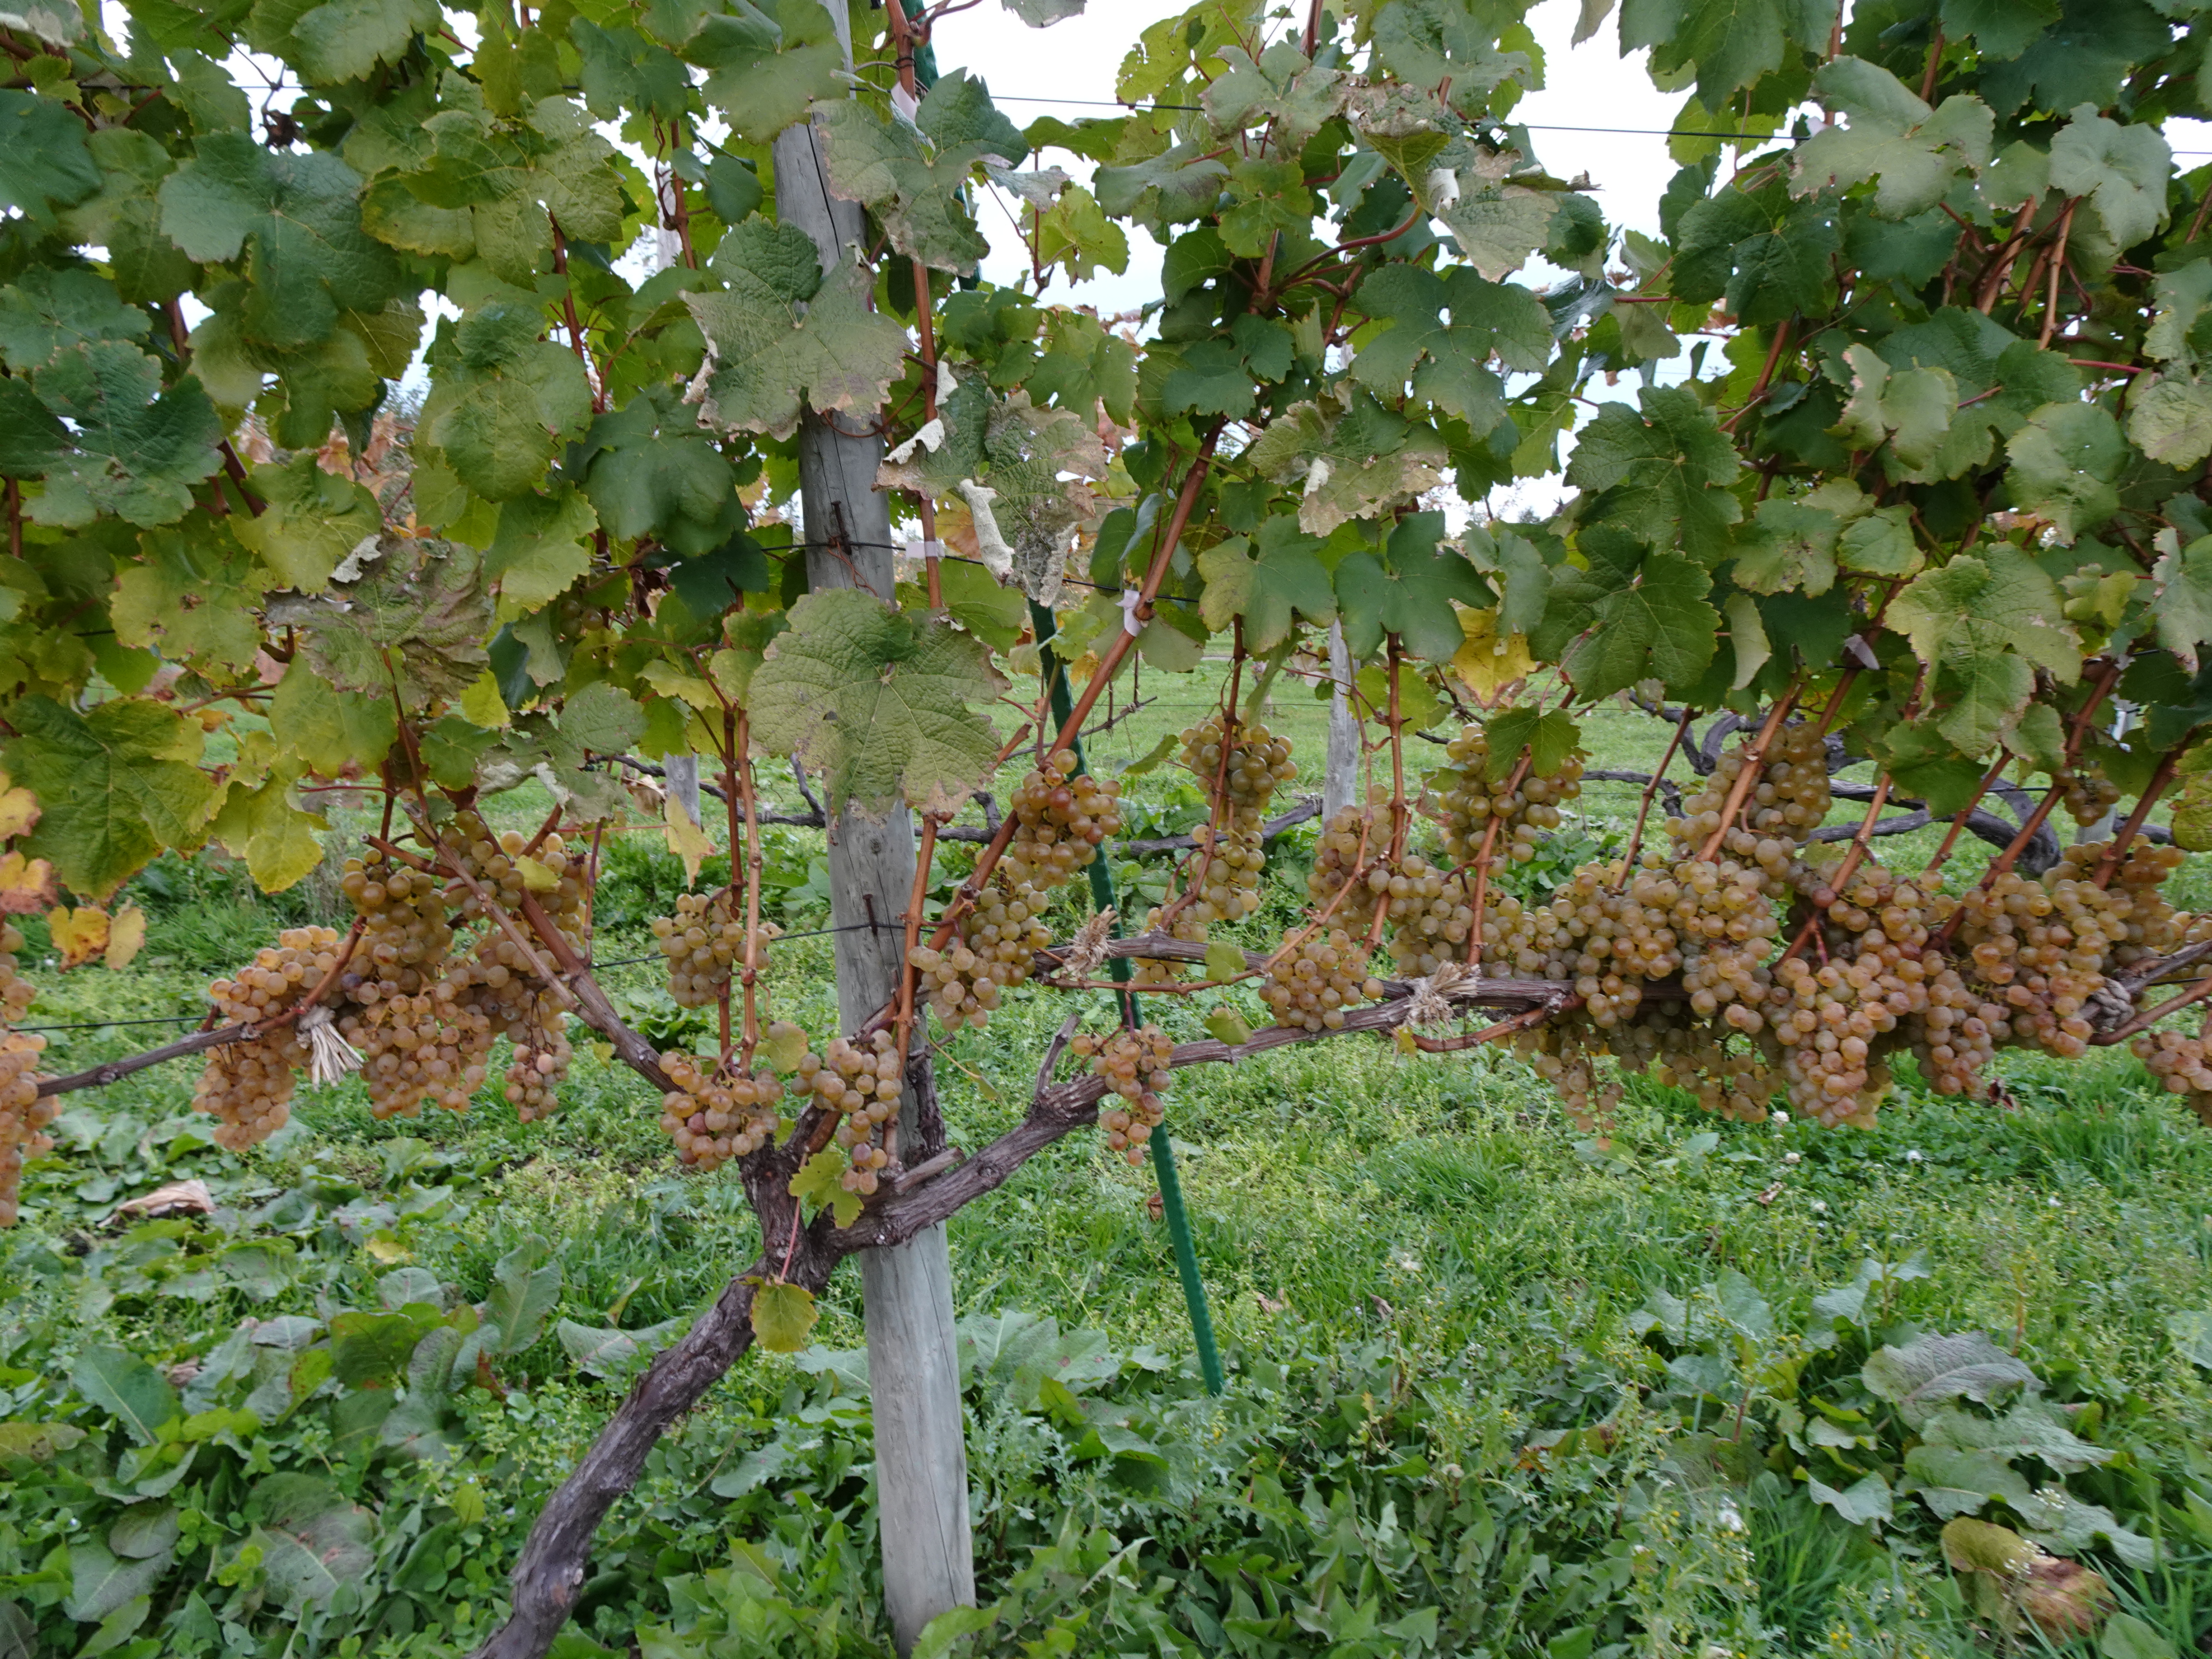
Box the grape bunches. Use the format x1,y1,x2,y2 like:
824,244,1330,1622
2164,905,2210,987
1659,1026,1791,1131
1174,704,1302,921
336,989,496,1125
1510,1001,1691,1156
445,918,584,1128
1131,869,1223,1002
1760,952,1923,1134
1513,1435,1558,1477
0,911,66,1242
338,846,460,997
1821,865,1960,970
732,1009,822,1074
902,846,1052,1031
792,1025,904,1194
1627,851,1781,1056
1312,770,1414,941
553,559,634,653
1463,851,1630,1029
1365,847,1474,979
411,802,568,928
1436,718,1590,880
1066,1018,1180,1167
1910,951,2019,1102
324,410,406,479
1251,925,1389,1035
1953,869,2134,1060
648,880,785,1013
1660,714,1833,898
189,918,368,1154
1004,746,1136,894
557,847,623,965
2039,753,2130,831
649,1041,790,1174
2041,824,2190,962
2124,1007,2212,1131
